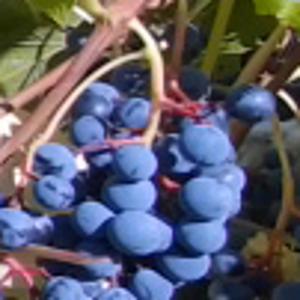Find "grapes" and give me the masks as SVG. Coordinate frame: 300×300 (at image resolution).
Masks as SVG:
<instances>
[{
	"mask_svg": "<svg viewBox=\"0 0 300 300\" xmlns=\"http://www.w3.org/2000/svg\"><path fill=\"white\" fill-rule=\"evenodd\" d=\"M179 75L174 102L90 82L71 107L74 147L42 142L31 150L36 200L70 215L40 216L0 194L1 248L30 244L102 259L46 261L54 278L40 300H169L182 284L244 272L228 226L245 210L250 174L237 162L228 118L269 121L278 100L261 84L243 83L214 109L200 70L184 65Z\"/></svg>",
	"mask_w": 300,
	"mask_h": 300,
	"instance_id": "obj_1",
	"label": "grapes"
}]
</instances>
